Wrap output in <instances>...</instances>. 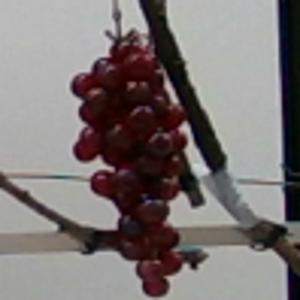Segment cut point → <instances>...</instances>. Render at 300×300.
<instances>
[{"instance_id":"6a23745f","label":"cut point","mask_w":300,"mask_h":300,"mask_svg":"<svg viewBox=\"0 0 300 300\" xmlns=\"http://www.w3.org/2000/svg\"><path fill=\"white\" fill-rule=\"evenodd\" d=\"M123 12L120 8V0H111L110 20L115 28V41L122 39Z\"/></svg>"}]
</instances>
